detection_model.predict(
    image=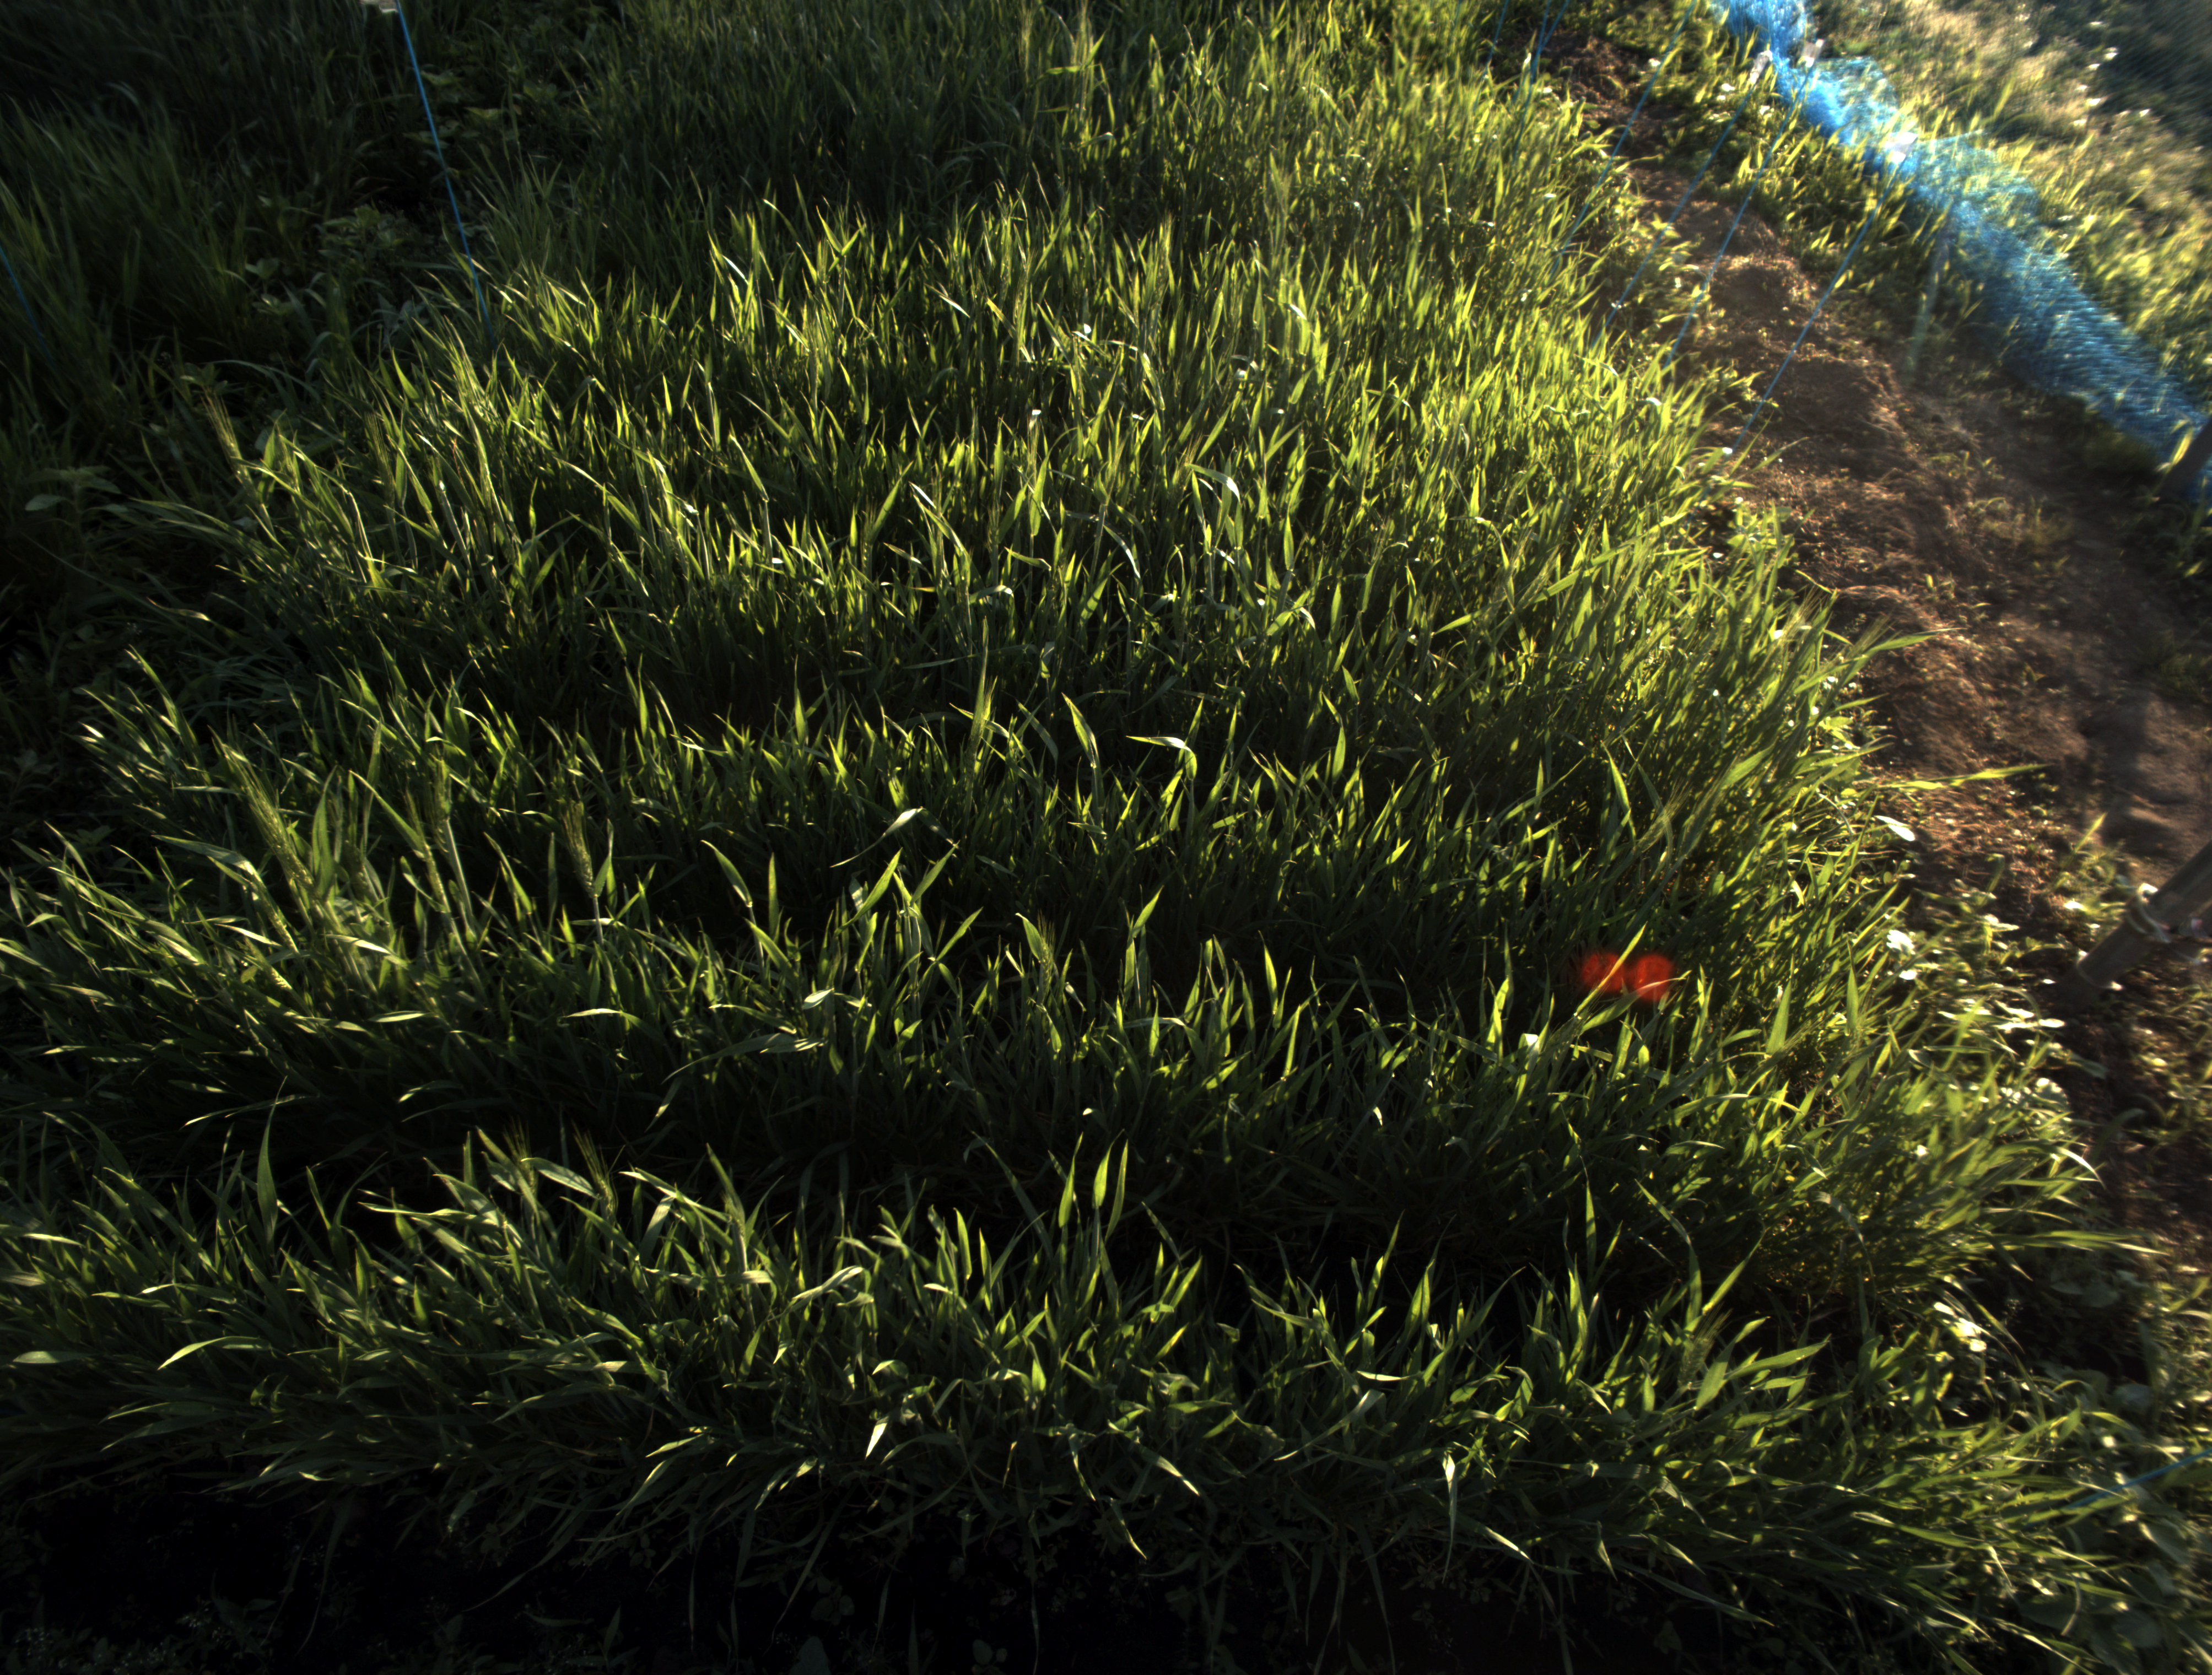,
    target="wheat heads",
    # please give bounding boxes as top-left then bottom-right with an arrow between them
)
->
1179,608 -> 1187,641
1637,818 -> 1665,851
965,722 -> 985,779
1743,1050 -> 1787,1089
1026,462 -> 1037,496
1910,1127 -> 1931,1142
1679,786 -> 1722,857
1938,1120 -> 1953,1143
1019,37 -> 1029,71
1501,574 -> 1541,628
1740,579 -> 1762,614
1830,646 -> 1865,695
1172,464 -> 1189,503
263,964 -> 288,988
1682,1338 -> 1708,1387
1431,426 -> 1443,466
956,577 -> 970,623
1437,20 -> 1452,64
1438,424 -> 1457,467
575,844 -> 594,892
1073,26 -> 1083,67
597,1173 -> 614,1202
434,791 -> 445,823
521,1164 -> 535,1191
861,523 -> 872,572
664,530 -> 689,565
285,463 -> 295,477
283,842 -> 312,884
351,843 -> 371,889
1790,632 -> 1807,666
1549,130 -> 1559,152
1175,379 -> 1185,404
1554,1027 -> 1580,1066
1104,468 -> 1116,495
255,793 -> 286,846
1000,254 -> 1010,301
363,835 -> 367,856
1152,246 -> 1168,295
806,332 -> 818,369
1608,561 -> 1640,626
1362,152 -> 1380,194
220,432 -> 256,497
1548,1017 -> 1574,1045
374,441 -> 396,500
1423,614 -> 1434,642
1457,113 -> 1468,153
1531,152 -> 1547,183
483,462 -> 503,522
1486,563 -> 1514,623
1052,542 -> 1069,590
1604,578 -> 1616,600
727,1205 -> 745,1234
1355,465 -> 1368,511
1014,286 -> 1024,325
1522,130 -> 1542,169
1284,47 -> 1300,100
419,841 -> 443,894
262,900 -> 294,945
484,497 -> 493,525
1436,95 -> 1443,123
1748,645 -> 1783,687
1467,1 -> 1482,22
1134,310 -> 1138,324
988,524 -> 999,557
816,265 -> 825,302
1822,653 -> 1842,674
1834,1029 -> 1861,1070
1039,936 -> 1050,990
1888,1046 -> 1911,1074
1221,381 -> 1230,403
